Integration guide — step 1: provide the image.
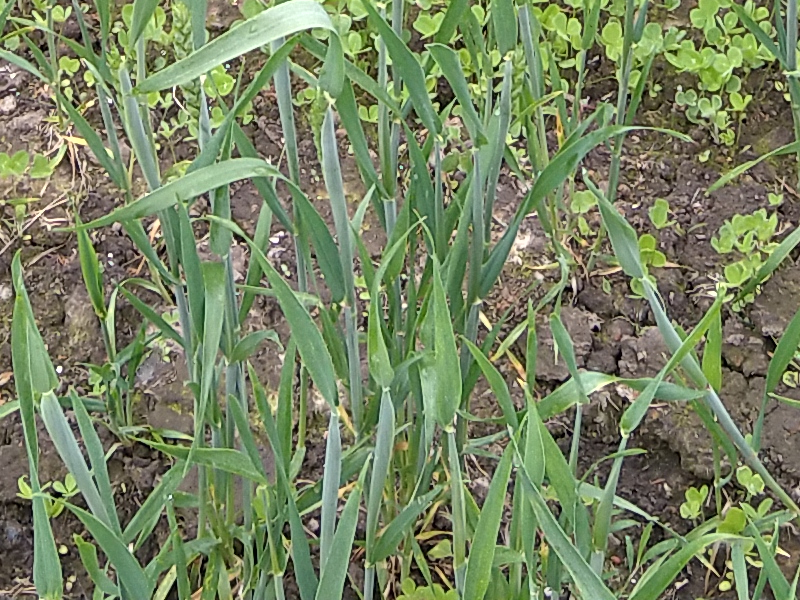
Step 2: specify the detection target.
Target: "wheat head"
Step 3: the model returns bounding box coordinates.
[510,51,526,115]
